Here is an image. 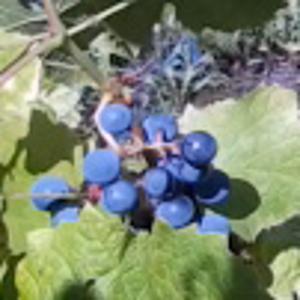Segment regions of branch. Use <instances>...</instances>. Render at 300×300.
<instances>
[{"instance_id":"branch-1","label":"branch","mask_w":300,"mask_h":300,"mask_svg":"<svg viewBox=\"0 0 300 300\" xmlns=\"http://www.w3.org/2000/svg\"><path fill=\"white\" fill-rule=\"evenodd\" d=\"M44 8L48 20L51 22L58 42L64 47L71 59L92 79V81L103 91L107 92L121 105L129 102V96L119 89L113 82L105 78L102 73L81 53L72 41L66 25L59 15L55 0H44Z\"/></svg>"}]
</instances>
